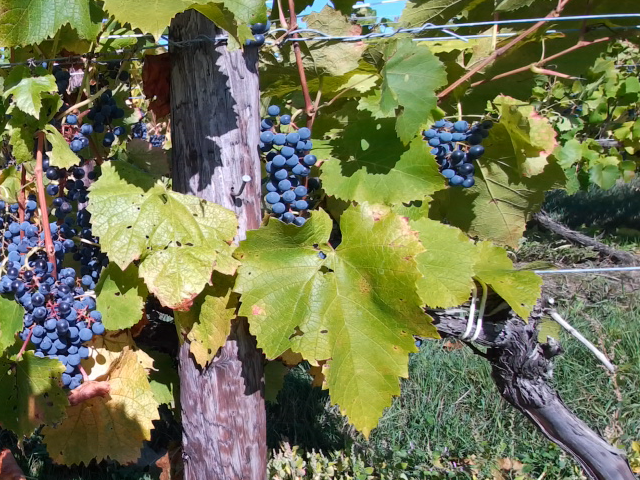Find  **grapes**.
<instances>
[{
	"label": "grapes",
	"mask_w": 640,
	"mask_h": 480,
	"mask_svg": "<svg viewBox=\"0 0 640 480\" xmlns=\"http://www.w3.org/2000/svg\"><path fill=\"white\" fill-rule=\"evenodd\" d=\"M71 176L76 181L65 180L64 188L68 191L67 196L52 199V206L58 207L55 216L58 219L64 218L63 224L59 227L57 221L50 222L51 234L54 238L53 245L56 250L58 279L51 276L52 263L44 258H38L29 261V266L34 271H24L22 281L17 280L20 277V269L25 266L24 255H27L34 246L45 245L44 231L40 232V228L30 220L33 212L38 208V197L35 194H29L25 221L19 224L14 218L7 219L8 225L4 237L11 239L6 246L8 256L5 272L8 275L0 278V294H15L16 301L25 311L22 320L24 327L19 331V339L26 341L30 335V341L37 345L35 354L38 357H58L65 366L62 373L63 383L69 389H78L82 381V373L75 366H78L81 360L90 358V350L82 344L90 342L94 335H103L106 332V327L100 323L102 314L94 310L97 307L96 300L90 296L82 297L85 294L83 287H88L90 290L97 288L100 271L102 267L108 265V257L99 247L91 246L89 243H84L80 252H77L78 245L71 240L78 235L79 239L92 244L100 242V238L94 237L90 232V211L80 208L75 213L76 226L82 229L79 234L77 229L70 227L74 224V218L65 217L72 211L70 200L77 199L79 203L89 201L90 191L87 186H84L82 180L86 176V171L73 169ZM65 253H74L73 259L81 260L80 284L82 286H77L75 278L78 276V270L74 266L61 267ZM45 295L56 298L55 313L58 318H54V314L45 305ZM81 309L91 311L89 318L94 322L91 327H88L85 321H77L78 311Z\"/></svg>",
	"instance_id": "01657485"
},
{
	"label": "grapes",
	"mask_w": 640,
	"mask_h": 480,
	"mask_svg": "<svg viewBox=\"0 0 640 480\" xmlns=\"http://www.w3.org/2000/svg\"><path fill=\"white\" fill-rule=\"evenodd\" d=\"M271 118L261 121L258 148L261 152H269L266 155L265 172L274 179L266 182V201L272 206V212L280 215V221L284 224H293L301 227L306 223L304 216H295L288 211H305L309 208V202L303 198L309 196L308 187L301 184L296 175L308 177L310 167L316 164L313 154H306L313 149L312 130L308 127H300L297 132L273 133Z\"/></svg>",
	"instance_id": "b958b902"
},
{
	"label": "grapes",
	"mask_w": 640,
	"mask_h": 480,
	"mask_svg": "<svg viewBox=\"0 0 640 480\" xmlns=\"http://www.w3.org/2000/svg\"><path fill=\"white\" fill-rule=\"evenodd\" d=\"M492 127L491 120H483L471 129L467 121L453 123L439 119L433 129L423 131L427 144L432 146L431 153L436 155L438 168L443 176L448 177L450 185L474 186L472 159H479L485 154V146L481 142L489 136Z\"/></svg>",
	"instance_id": "0513c4c2"
},
{
	"label": "grapes",
	"mask_w": 640,
	"mask_h": 480,
	"mask_svg": "<svg viewBox=\"0 0 640 480\" xmlns=\"http://www.w3.org/2000/svg\"><path fill=\"white\" fill-rule=\"evenodd\" d=\"M79 132L74 136L75 140L70 142V149L73 152H80L90 145V139L87 136H91L94 133V127L91 123L84 122L80 125Z\"/></svg>",
	"instance_id": "84f90ec7"
},
{
	"label": "grapes",
	"mask_w": 640,
	"mask_h": 480,
	"mask_svg": "<svg viewBox=\"0 0 640 480\" xmlns=\"http://www.w3.org/2000/svg\"><path fill=\"white\" fill-rule=\"evenodd\" d=\"M272 26V22L267 20L264 24H252L250 26L251 33L253 37H249L245 40V45L247 47H259L265 42L264 33Z\"/></svg>",
	"instance_id": "f8a65327"
},
{
	"label": "grapes",
	"mask_w": 640,
	"mask_h": 480,
	"mask_svg": "<svg viewBox=\"0 0 640 480\" xmlns=\"http://www.w3.org/2000/svg\"><path fill=\"white\" fill-rule=\"evenodd\" d=\"M126 133V128L123 125H117L113 129V134L106 133L102 138V146L104 148H110L115 142V136L121 137Z\"/></svg>",
	"instance_id": "5460f4e3"
},
{
	"label": "grapes",
	"mask_w": 640,
	"mask_h": 480,
	"mask_svg": "<svg viewBox=\"0 0 640 480\" xmlns=\"http://www.w3.org/2000/svg\"><path fill=\"white\" fill-rule=\"evenodd\" d=\"M42 171L45 172V177L49 181H57L61 178V172L55 167H51L48 157L42 159Z\"/></svg>",
	"instance_id": "83cd7487"
}]
</instances>
